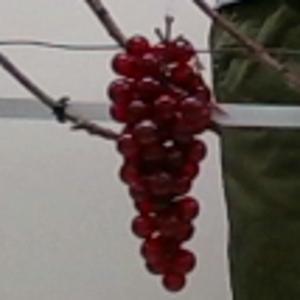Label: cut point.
Instances as JSON below:
<instances>
[{"label":"cut point","instance_id":"obj_1","mask_svg":"<svg viewBox=\"0 0 300 300\" xmlns=\"http://www.w3.org/2000/svg\"><path fill=\"white\" fill-rule=\"evenodd\" d=\"M165 25V40L172 42V26L176 22V16L173 14V0H166V12L161 16Z\"/></svg>","mask_w":300,"mask_h":300}]
</instances>
